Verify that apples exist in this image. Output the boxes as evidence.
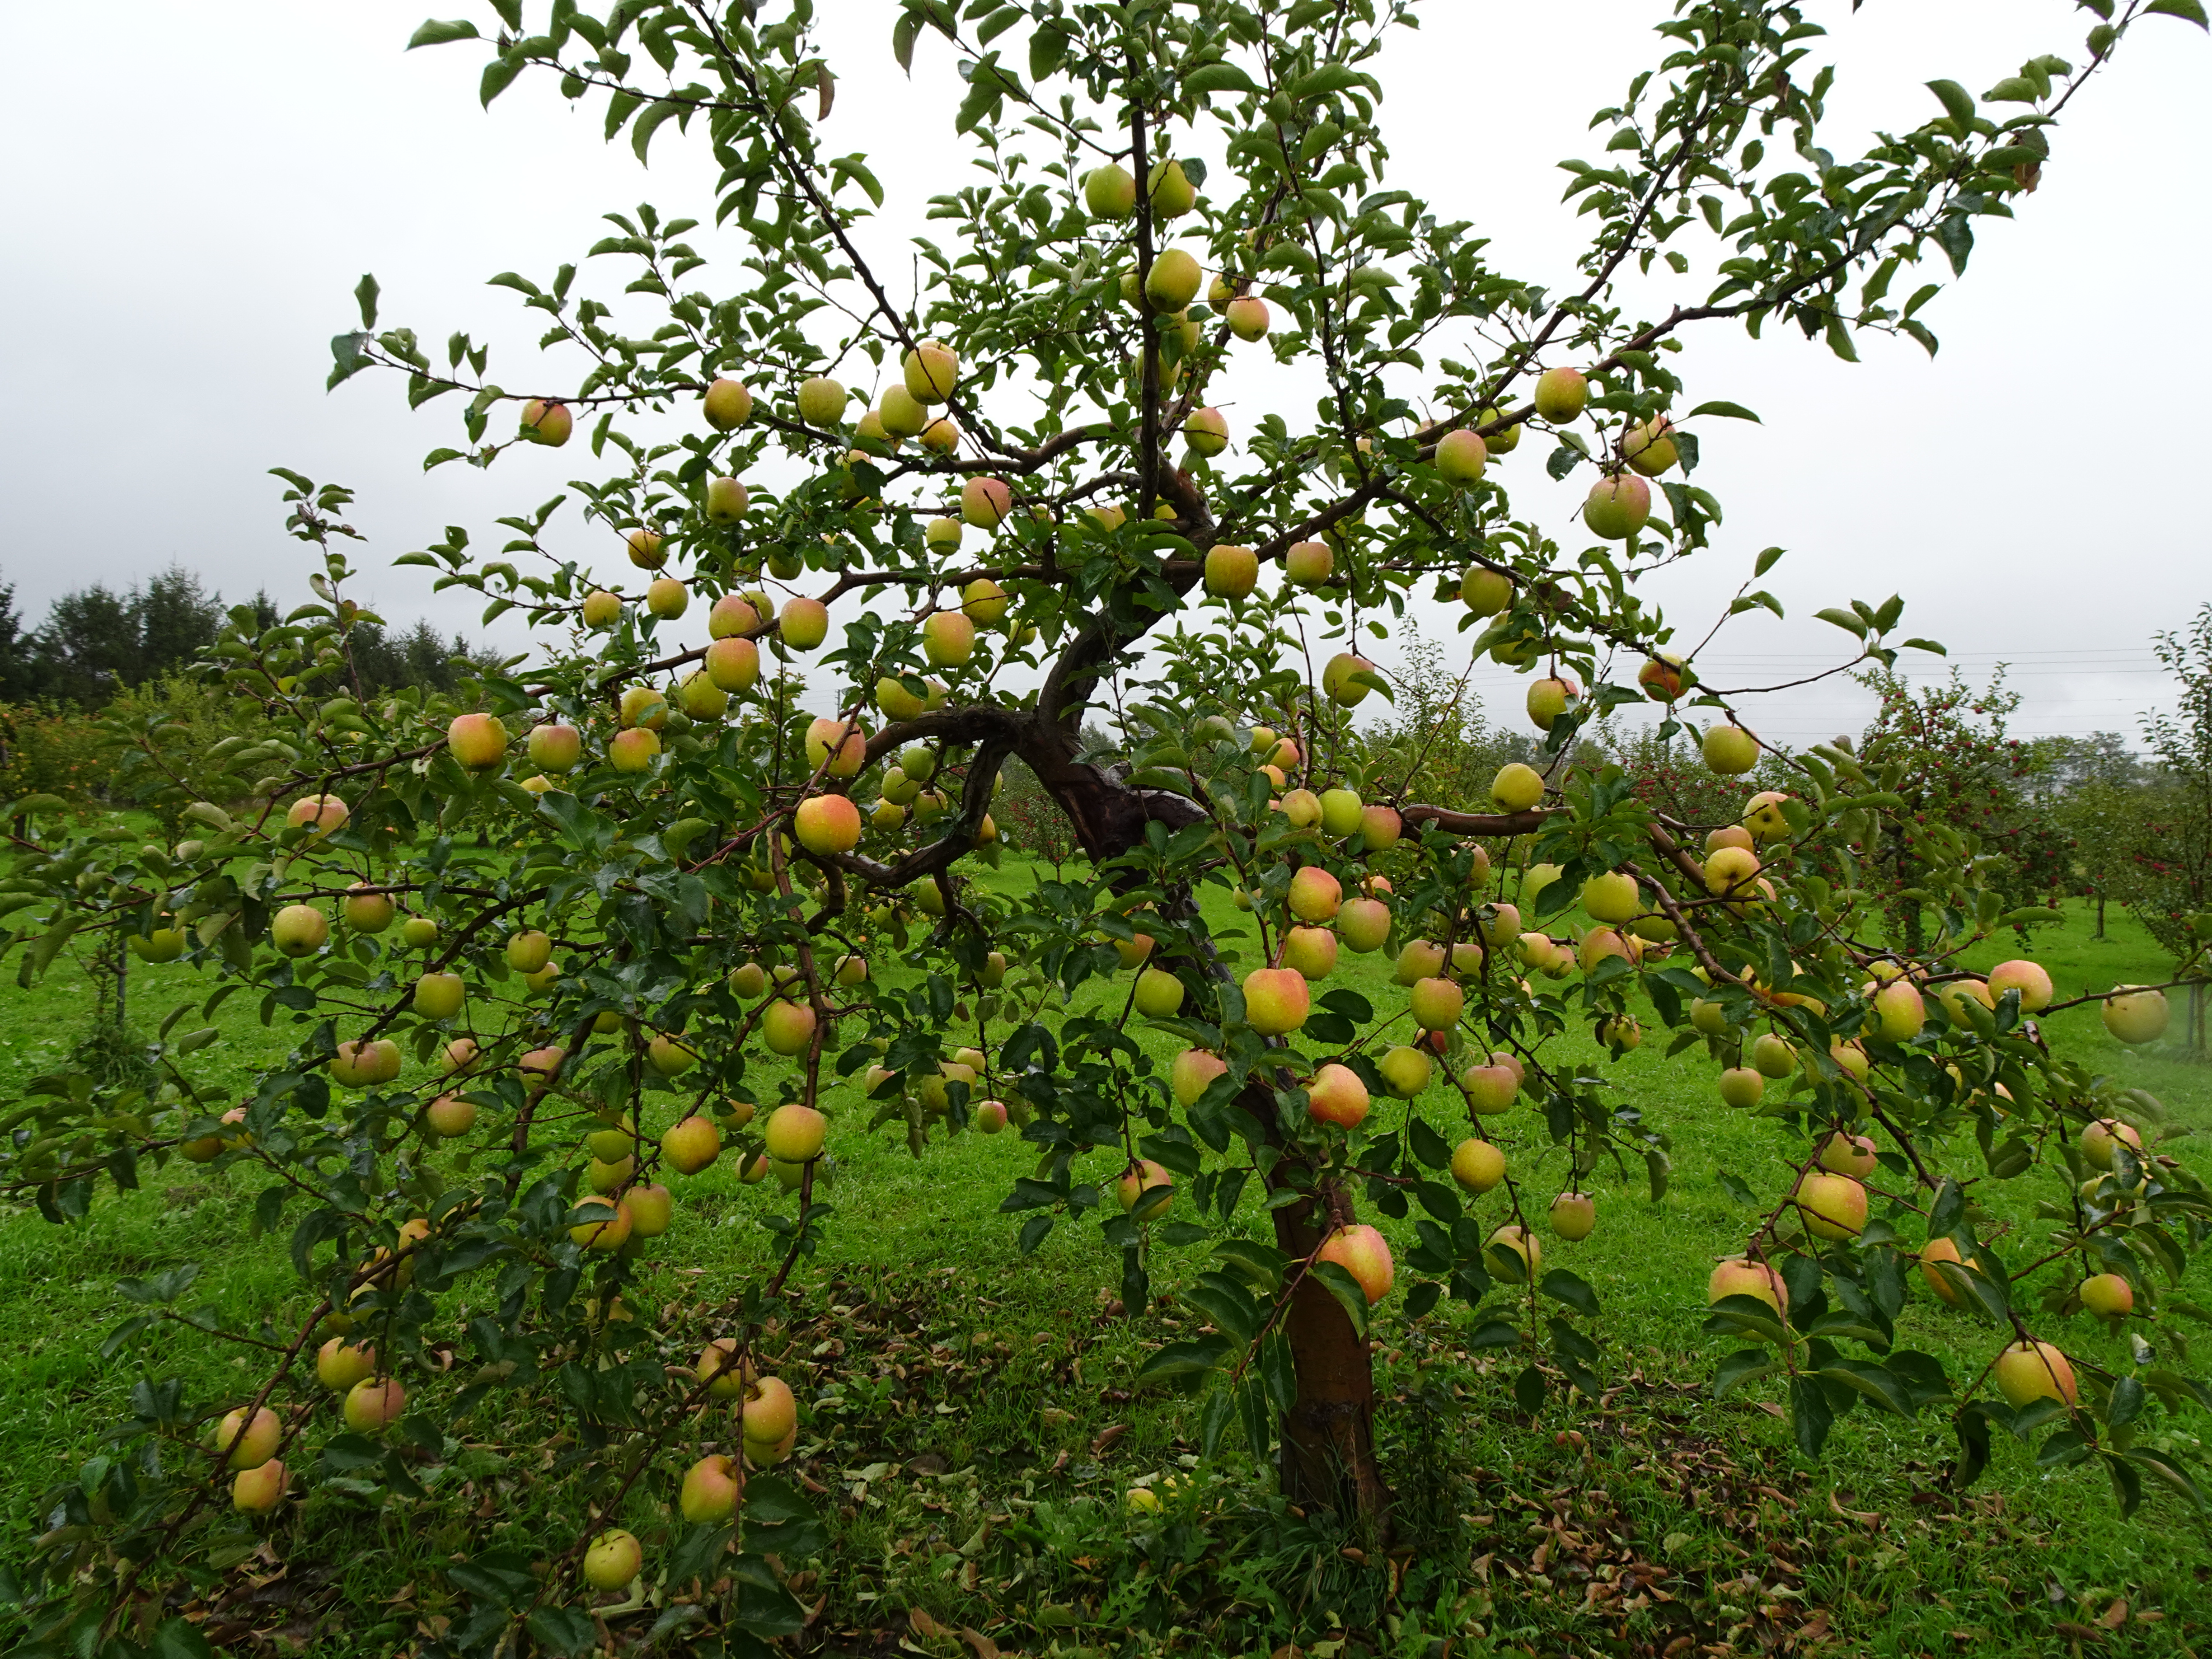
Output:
[519,775,553,795]
[591,1011,623,1035]
[737,590,775,624]
[1479,407,1520,454]
[735,1376,796,1445]
[344,885,396,933]
[1322,653,1374,707]
[525,961,560,992]
[990,770,1003,798]
[365,1039,401,1086]
[330,1040,380,1089]
[2133,1161,2154,1195]
[1742,791,1792,842]
[1489,610,1535,665]
[1820,1132,1877,1181]
[217,1406,281,1471]
[803,995,835,1017]
[853,496,884,515]
[1705,825,1753,859]
[921,680,948,712]
[1753,1033,1798,1079]
[1118,1160,1173,1221]
[1397,940,1445,988]
[271,905,328,958]
[1719,1067,1763,1108]
[746,951,768,974]
[1987,960,2053,1015]
[954,1047,986,1077]
[569,1195,633,1252]
[1320,500,1365,545]
[2080,1118,2141,1171]
[860,1032,888,1058]
[742,1424,795,1465]
[507,930,551,974]
[1702,725,1760,775]
[705,638,760,695]
[1077,509,1114,534]
[1145,248,1202,313]
[680,669,728,722]
[1410,977,1463,1030]
[129,911,185,963]
[1579,925,1637,975]
[628,529,669,570]
[706,477,748,527]
[1527,678,1579,731]
[794,794,861,856]
[903,346,956,405]
[1982,1081,2014,1121]
[709,595,758,641]
[1861,980,1924,1043]
[1461,565,1512,617]
[1642,940,1670,963]
[1463,1065,1517,1115]
[1897,961,1930,990]
[926,518,962,555]
[2101,984,2169,1045]
[1482,1052,1525,1091]
[881,766,920,806]
[694,983,717,1016]
[1534,367,1588,424]
[1161,304,1199,356]
[588,1113,635,1165]
[763,1000,816,1056]
[1690,996,1729,1035]
[1631,899,1676,942]
[1111,933,1155,970]
[977,1101,1007,1134]
[751,831,791,872]
[1796,1171,1867,1241]
[1317,789,1363,836]
[1249,726,1276,754]
[798,377,846,427]
[718,1098,754,1131]
[583,591,622,629]
[219,1108,253,1150]
[1008,618,1037,646]
[344,1377,405,1433]
[1147,159,1195,218]
[426,1089,476,1138]
[821,533,851,571]
[1473,935,1501,957]
[1830,1045,1868,1080]
[703,378,752,431]
[912,789,948,825]
[874,898,909,935]
[1435,430,1487,487]
[1302,1064,1371,1132]
[871,797,905,833]
[1477,903,1520,948]
[521,399,572,447]
[1622,930,1644,962]
[1085,163,1135,219]
[1526,863,1565,906]
[1268,799,1280,813]
[768,553,803,580]
[346,881,367,890]
[359,1246,412,1294]
[1549,1192,1595,1241]
[876,670,926,722]
[1920,1237,1985,1302]
[1497,977,1532,1000]
[528,724,580,774]
[697,1338,757,1399]
[1029,504,1056,526]
[1945,1063,1962,1101]
[834,449,874,499]
[609,727,661,774]
[1339,438,1384,482]
[1623,414,1678,477]
[398,1218,442,1275]
[1381,1046,1430,1100]
[917,339,958,378]
[1233,886,1262,912]
[1483,1225,1541,1284]
[865,1065,896,1096]
[1242,968,1310,1037]
[1604,1014,1640,1054]
[1123,902,1160,917]
[961,477,1011,529]
[1239,227,1273,271]
[973,952,1006,988]
[286,794,350,855]
[729,963,764,999]
[1726,877,1777,918]
[1172,1049,1228,1110]
[325,1281,380,1337]
[1830,1034,1866,1053]
[403,918,436,948]
[1184,407,1229,457]
[518,1046,565,1093]
[1541,944,1575,980]
[317,1336,375,1393]
[779,598,828,650]
[835,955,867,987]
[1106,505,1126,528]
[1134,968,1184,1018]
[1449,943,1483,982]
[1359,876,1394,894]
[739,855,777,896]
[1135,346,1181,391]
[440,1196,483,1223]
[1995,1341,2076,1411]
[1436,907,1469,935]
[1282,925,1338,981]
[1288,866,1342,922]
[2081,1173,2112,1209]
[765,1105,825,1164]
[919,418,959,455]
[921,1062,976,1115]
[1451,1138,1505,1194]
[772,1143,826,1189]
[233,1457,289,1516]
[1414,419,1445,469]
[1862,960,1908,983]
[917,878,947,916]
[973,812,996,850]
[767,965,799,996]
[733,557,760,583]
[1689,965,1719,990]
[1524,832,1546,848]
[1226,296,1269,342]
[1741,959,1806,1007]
[1802,996,1825,1018]
[647,578,688,620]
[1286,542,1333,589]
[1316,1224,1393,1306]
[178,1138,227,1163]
[2079,1273,2133,1321]
[1638,653,1690,702]
[962,579,1008,628]
[589,1153,634,1194]
[681,1454,745,1524]
[622,1185,671,1238]
[879,384,928,437]
[814,875,850,907]
[447,713,507,772]
[923,612,975,668]
[415,972,464,1020]
[1357,806,1402,851]
[1449,842,1490,891]
[649,1030,695,1076]
[1205,544,1258,600]
[888,848,913,864]
[1491,762,1544,813]
[1278,789,1323,830]
[735,1152,768,1185]
[805,718,866,778]
[519,1012,550,1044]
[1120,262,1142,312]
[1704,847,1761,898]
[1336,897,1391,953]
[1583,473,1651,540]
[1416,1027,1447,1056]
[1208,273,1250,315]
[1708,1260,1788,1343]
[856,411,901,451]
[1939,979,1996,1031]
[901,747,935,782]
[584,1528,642,1593]
[1256,764,1285,786]
[661,1116,720,1176]
[1153,494,1177,520]
[1516,933,1552,969]
[1583,870,1639,924]
[621,687,668,735]
[441,1038,482,1079]
[1267,738,1299,770]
